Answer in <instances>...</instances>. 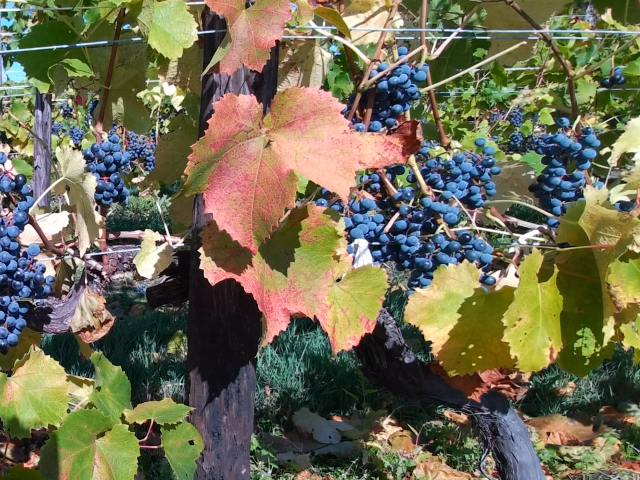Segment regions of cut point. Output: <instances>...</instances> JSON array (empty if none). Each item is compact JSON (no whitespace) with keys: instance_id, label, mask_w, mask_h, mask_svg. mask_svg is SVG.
Segmentation results:
<instances>
[{"instance_id":"obj_1","label":"cut point","mask_w":640,"mask_h":480,"mask_svg":"<svg viewBox=\"0 0 640 480\" xmlns=\"http://www.w3.org/2000/svg\"><path fill=\"white\" fill-rule=\"evenodd\" d=\"M441 229H442V230L447 234V237H451L450 231L445 227V225H444V224H441V225H439V226H438V228H436V230H435V235H438V232H439Z\"/></svg>"},{"instance_id":"obj_2","label":"cut point","mask_w":640,"mask_h":480,"mask_svg":"<svg viewBox=\"0 0 640 480\" xmlns=\"http://www.w3.org/2000/svg\"><path fill=\"white\" fill-rule=\"evenodd\" d=\"M580 118H581V115H577L575 121H573V124L571 126V130H575V125L579 122Z\"/></svg>"}]
</instances>
